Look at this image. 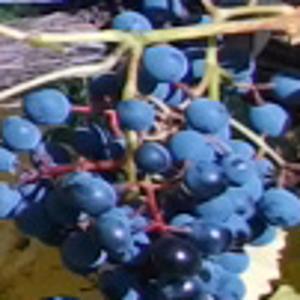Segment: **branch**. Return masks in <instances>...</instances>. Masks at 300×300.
Returning a JSON list of instances; mask_svg holds the SVG:
<instances>
[{"mask_svg": "<svg viewBox=\"0 0 300 300\" xmlns=\"http://www.w3.org/2000/svg\"><path fill=\"white\" fill-rule=\"evenodd\" d=\"M283 30L287 37L300 38V9L287 15L268 14L265 19L224 18L219 26L171 27L165 29L129 30L120 32H89L76 34L43 33L17 29L0 24V36L12 40L53 45H80L94 43H125L135 39L141 41L169 40L175 38L206 37L209 32L217 36L238 33L270 32Z\"/></svg>", "mask_w": 300, "mask_h": 300, "instance_id": "30e6481e", "label": "branch"}]
</instances>
